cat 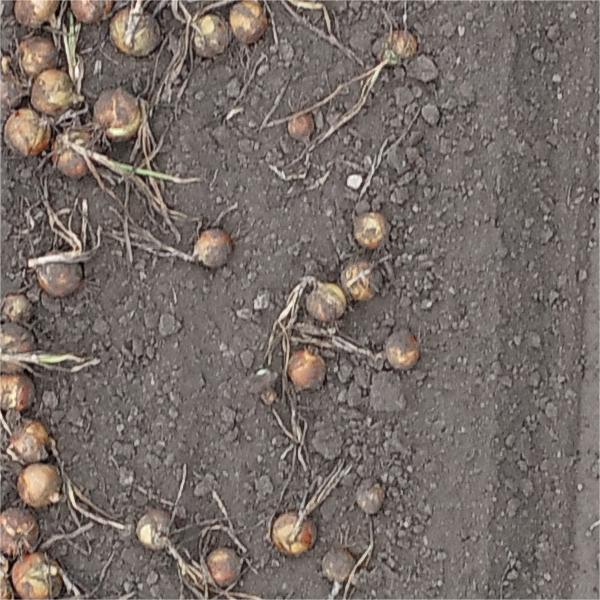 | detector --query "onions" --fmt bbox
[287,350,324,389]
[1,67,30,103]
[110,9,158,54]
[378,28,418,62]
[37,259,77,296]
[30,69,76,115]
[51,147,86,177]
[324,545,366,585]
[225,2,265,44]
[306,283,343,322]
[4,111,51,153]
[18,36,56,75]
[94,90,140,139]
[11,552,67,594]
[193,228,230,268]
[190,11,232,55]
[382,328,418,367]
[287,111,314,140]
[1,374,34,412]
[2,291,30,324]
[350,210,386,246]
[18,0,57,26]
[132,509,167,548]
[355,481,384,511]
[341,256,380,301]
[2,323,32,354]
[271,511,314,553]
[17,461,60,503]
[204,545,239,582]
[0,506,40,547]
[69,0,108,24]
[8,421,49,461]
